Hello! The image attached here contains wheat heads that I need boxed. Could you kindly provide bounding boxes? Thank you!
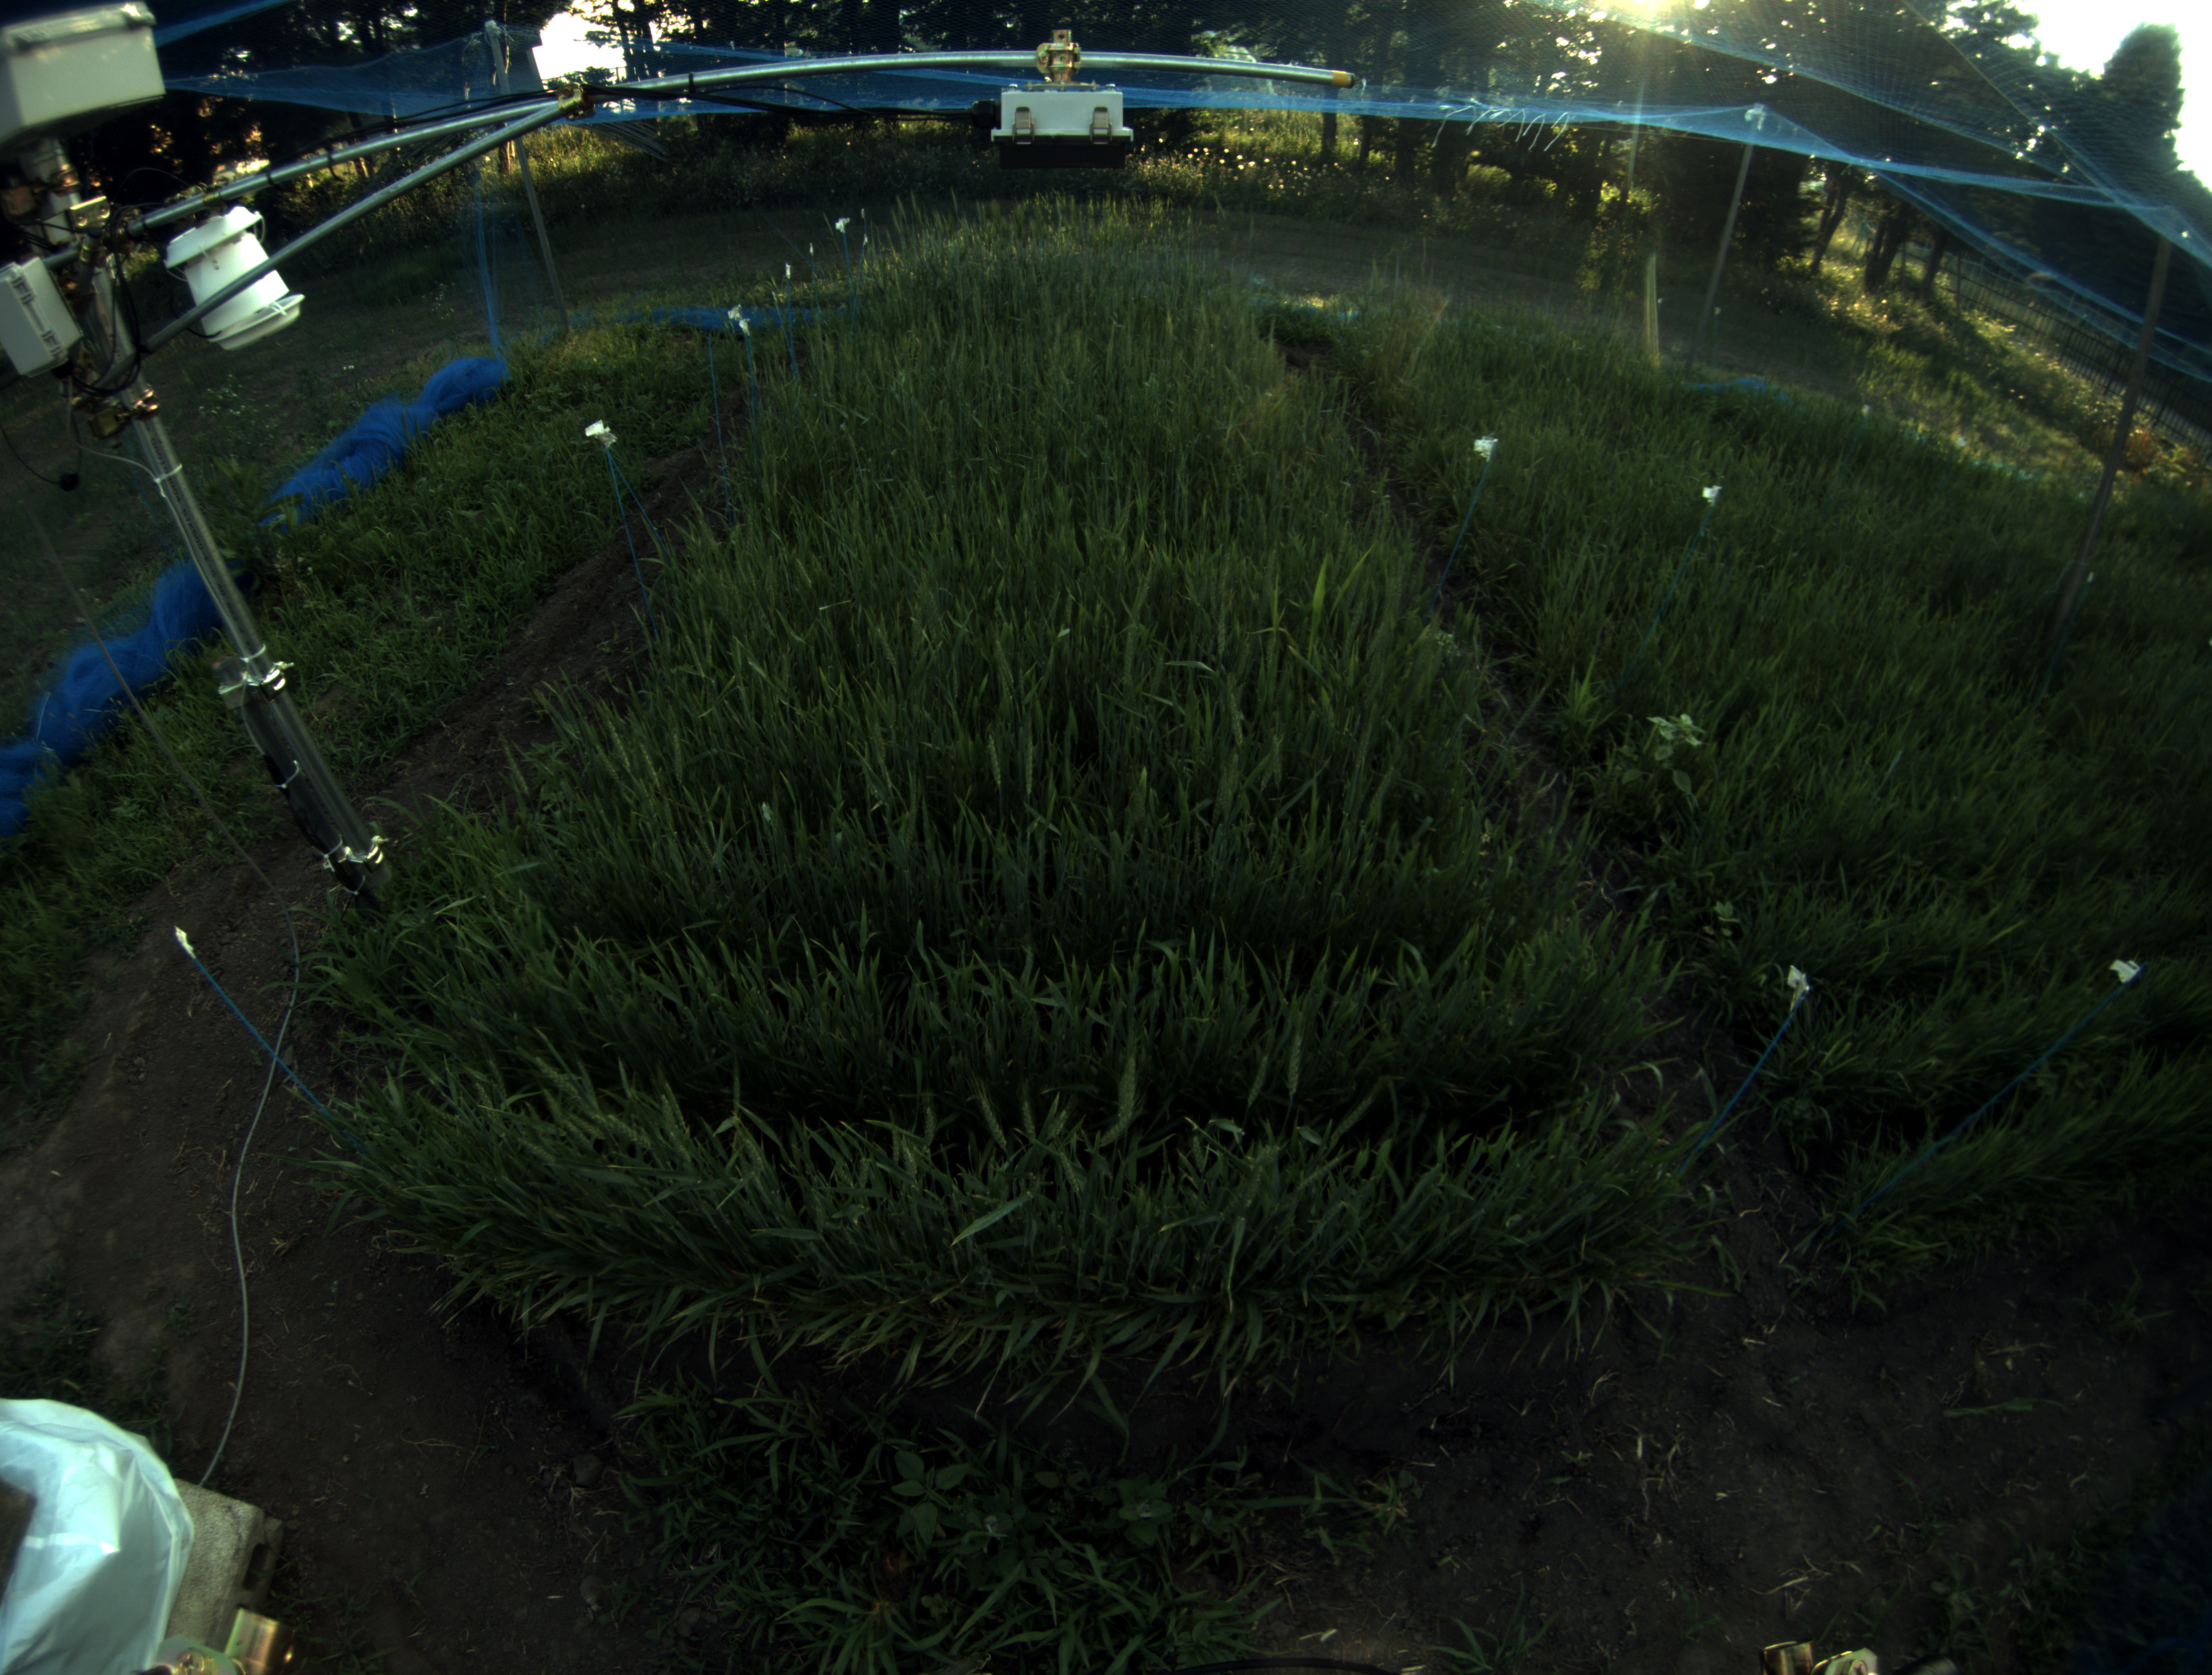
[1342,648,1350,670]
[698,519,718,555]
[736,524,744,550]
[1106,1227,1114,1243]
[970,1207,976,1218]
[946,474,954,510]
[1183,302,1187,315]
[927,838,935,864]
[1229,753,1240,792]
[1381,698,1394,722]
[910,773,917,812]
[853,501,859,537]
[1072,1243,1079,1255]
[925,596,937,640]
[916,351,922,375]
[1394,576,1406,605]
[1006,537,1009,552]
[771,789,778,828]
[1194,824,1201,856]
[769,584,775,610]
[982,299,987,314]
[1396,684,1420,718]
[1063,831,1068,851]
[1255,494,1267,545]
[1013,246,1017,257]
[1027,947,1033,971]
[847,359,853,377]
[891,693,897,721]
[987,1158,994,1179]
[1222,1182,1249,1217]
[1066,595,1073,624]
[911,334,916,356]
[876,626,897,667]
[1221,767,1229,814]
[1244,1166,1264,1208]
[1355,723,1371,766]
[1368,638,1383,677]
[981,1098,1007,1149]
[1118,326,1124,342]
[752,360,757,374]
[1330,540,1346,586]
[607,721,630,768]
[1246,1055,1269,1105]
[430,1105,463,1127]
[1264,1029,1275,1054]
[886,230,892,244]
[721,558,733,594]
[826,349,833,371]
[1322,1202,1343,1224]
[733,1077,740,1113]
[982,836,988,862]
[908,475,931,510]
[885,263,890,275]
[1364,672,1385,708]
[475,865,495,907]
[1211,780,1223,824]
[568,1114,606,1140]
[977,201,981,222]
[1263,348,1269,383]
[660,1093,676,1131]
[1487,706,1504,727]
[1105,344,1110,377]
[765,483,771,501]
[1255,688,1262,703]
[891,1130,900,1163]
[950,189,958,211]
[1172,417,1178,436]
[769,373,778,395]
[1273,733,1282,785]
[1236,643,1250,678]
[1022,518,1028,551]
[863,847,871,869]
[1269,339,1274,372]
[1026,736,1033,796]
[1258,580,1272,623]
[1217,552,1230,594]
[1017,667,1025,701]
[886,296,891,314]
[1150,657,1164,699]
[957,355,964,378]
[865,772,879,798]
[1124,488,1131,524]
[995,640,1013,686]
[938,567,944,588]
[752,370,758,387]
[815,1206,824,1233]
[1229,692,1243,745]
[535,1056,584,1105]
[1384,576,1396,616]
[1368,766,1394,813]
[845,371,849,387]
[1398,972,1405,994]
[877,359,885,387]
[702,618,709,651]
[1251,344,1259,374]
[813,979,821,993]
[1266,637,1275,667]
[1182,890,1190,908]
[1197,576,1208,615]
[1454,862,1464,874]
[1260,756,1274,789]
[665,1083,685,1127]
[922,295,927,316]
[910,468,920,501]
[822,652,828,666]
[1051,585,1058,620]
[1167,322,1174,353]
[685,635,704,675]
[1038,385,1048,405]
[1268,842,1280,871]
[883,432,891,455]
[1263,549,1276,588]
[1220,352,1226,379]
[1110,344,1113,373]
[980,354,984,371]
[744,848,751,866]
[1273,664,1288,707]
[930,525,937,553]
[1054,356,1061,382]
[1156,379,1160,392]
[1345,602,1364,650]
[1098,506,1105,537]
[1217,604,1226,656]
[698,862,705,877]
[1117,1057,1136,1116]
[957,271,962,294]
[741,573,767,624]
[543,1089,565,1128]
[715,573,730,621]
[1071,339,1079,369]
[1193,1134,1205,1172]
[695,830,713,860]
[461,1013,486,1032]
[1417,619,1441,674]
[751,1153,760,1177]
[1346,670,1353,689]
[1227,409,1234,430]
[965,844,971,872]
[781,654,789,691]
[759,436,767,454]
[950,345,956,364]
[731,654,742,686]
[1100,1111,1133,1146]
[481,978,500,998]
[1054,328,1061,354]
[1601,1131,1637,1165]
[663,795,672,825]
[1601,350,1610,370]
[1026,240,1031,256]
[562,1119,593,1150]
[946,358,950,381]
[1024,340,1029,367]
[873,342,879,365]
[848,435,858,457]
[1037,618,1043,639]
[952,668,958,699]
[892,212,901,234]
[1137,571,1151,609]
[738,586,753,601]
[592,1115,627,1137]
[673,733,684,783]
[1124,814,1135,844]
[378,1178,411,1198]
[903,1147,917,1174]
[966,403,971,425]
[1177,437,1184,457]
[703,798,711,821]
[997,344,1005,369]
[1098,728,1105,752]
[1126,335,1132,366]
[563,698,581,734]
[993,363,997,380]
[874,738,892,789]
[475,1082,500,1122]
[911,607,923,655]
[1112,998,1122,1025]
[1286,1036,1302,1097]
[595,744,620,783]
[933,323,941,349]
[723,455,727,466]
[699,514,708,556]
[864,342,872,367]
[748,614,754,634]
[639,778,655,815]
[1030,1176,1039,1196]
[779,552,787,571]
[577,1060,595,1097]
[823,373,831,398]
[765,555,772,589]
[989,734,1002,785]
[1166,430,1176,450]
[1346,794,1364,834]
[834,1160,851,1185]
[771,474,777,497]
[1134,791,1146,825]
[644,628,651,651]
[385,1096,410,1124]
[933,884,941,898]
[1236,684,1243,704]
[640,742,660,788]
[517,1137,556,1163]
[1298,1158,1339,1190]
[1046,1112,1068,1138]
[669,1131,691,1164]
[740,1153,749,1177]
[685,692,703,728]
[810,342,816,364]
[504,746,529,795]
[1149,1233,1156,1246]
[489,1060,507,1102]
[859,1157,869,1187]
[910,193,916,212]
[906,336,911,349]
[922,355,927,374]
[999,666,1010,698]
[796,557,811,588]
[803,419,814,441]
[1330,1096,1372,1144]
[1065,841,1075,862]
[982,206,987,220]
[1802,910,1824,950]
[924,1107,936,1146]
[1196,336,1204,358]
[907,440,913,453]
[897,196,905,216]
[836,315,843,327]
[1059,1151,1080,1193]
[928,590,943,634]
[707,644,712,667]
[607,1114,651,1148]
[1018,341,1023,363]
[886,414,893,434]
[931,456,936,473]
[882,338,889,361]
[1344,565,1362,608]
[927,334,933,355]
[1177,395,1182,415]
[763,708,776,735]
[902,350,909,375]
[1299,407,1308,429]
[1514,687,1546,731]
[926,307,930,321]
[917,207,922,222]
[747,562,756,589]
[746,1138,764,1170]
[1434,628,1462,657]
[1152,1254,1158,1267]
[1128,674,1137,709]
[942,214,947,225]
[1284,950,1294,985]
[1459,674,1469,709]
[874,720,887,760]
[895,277,902,302]
[733,586,742,611]
[917,308,921,322]
[745,515,753,558]
[922,412,932,434]
[952,380,957,401]
[1264,1147,1279,1166]
[952,1200,958,1217]
[905,810,916,848]
[1124,631,1134,680]
[1209,580,1216,619]
[862,368,875,392]
[1000,1184,1010,1203]
[1181,412,1193,435]
[1022,1100,1036,1138]
[1029,351,1033,370]
[1365,621,1385,661]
